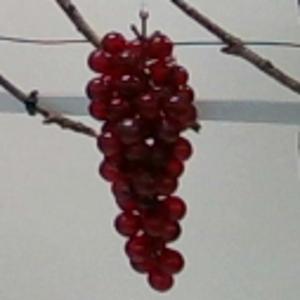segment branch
Segmentation results:
<instances>
[{
  "label": "branch",
  "mask_w": 300,
  "mask_h": 300,
  "mask_svg": "<svg viewBox=\"0 0 300 300\" xmlns=\"http://www.w3.org/2000/svg\"><path fill=\"white\" fill-rule=\"evenodd\" d=\"M203 128H204V126L201 123H199L198 121H196L195 124L192 125L191 127H187V129L193 131V133L198 134V135Z\"/></svg>",
  "instance_id": "4"
},
{
  "label": "branch",
  "mask_w": 300,
  "mask_h": 300,
  "mask_svg": "<svg viewBox=\"0 0 300 300\" xmlns=\"http://www.w3.org/2000/svg\"><path fill=\"white\" fill-rule=\"evenodd\" d=\"M168 2L174 5L206 32L225 44V47L219 49L220 53L245 60L261 74H265L276 83L282 85L283 88L288 89L296 95H300L299 80L294 79L285 71L280 70V68L274 65L269 58L265 59L257 52L252 51L251 48L244 46V40L231 35V33L221 28L218 24L212 22L207 16L200 13L192 4H189L184 0H169Z\"/></svg>",
  "instance_id": "1"
},
{
  "label": "branch",
  "mask_w": 300,
  "mask_h": 300,
  "mask_svg": "<svg viewBox=\"0 0 300 300\" xmlns=\"http://www.w3.org/2000/svg\"><path fill=\"white\" fill-rule=\"evenodd\" d=\"M64 16L94 49L101 48L102 38L84 19L77 6L71 0H53Z\"/></svg>",
  "instance_id": "3"
},
{
  "label": "branch",
  "mask_w": 300,
  "mask_h": 300,
  "mask_svg": "<svg viewBox=\"0 0 300 300\" xmlns=\"http://www.w3.org/2000/svg\"><path fill=\"white\" fill-rule=\"evenodd\" d=\"M0 86L6 90L16 101L24 105L25 111L29 117H36L37 114L44 117L41 121L43 126L55 124L63 131L71 130L74 133H81L88 138H94L97 141L100 134L95 129L81 121L71 120L63 117L62 114L51 111L40 103V93L38 89H33L29 94H25L15 84L7 80L0 72Z\"/></svg>",
  "instance_id": "2"
}]
</instances>
